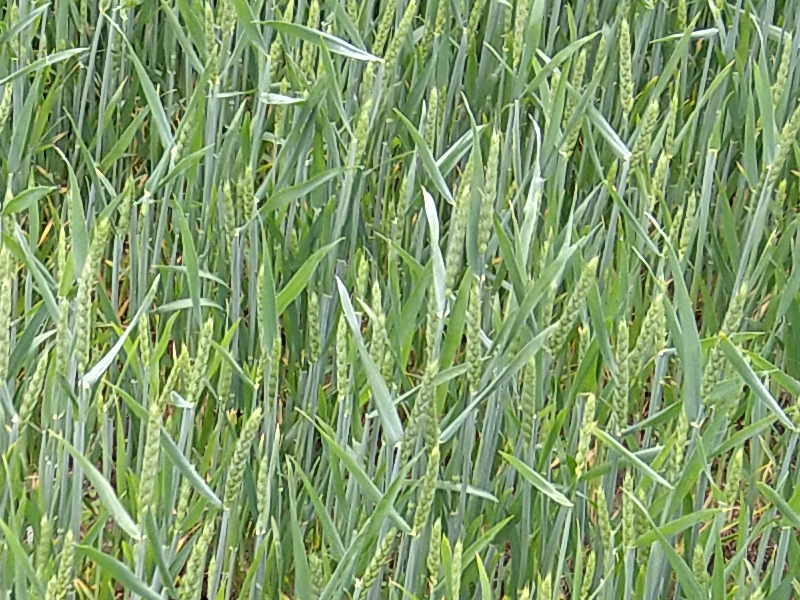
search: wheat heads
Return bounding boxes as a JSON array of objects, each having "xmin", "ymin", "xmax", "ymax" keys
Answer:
[
  {"xmin": 0, "ymin": 83, "xmax": 14, "ymax": 142},
  {"xmin": 577, "ymin": 324, "xmax": 590, "ymax": 365},
  {"xmin": 503, "ymin": 0, "xmax": 514, "ymax": 35},
  {"xmin": 274, "ymin": 76, "xmax": 289, "ymax": 135},
  {"xmin": 180, "ymin": 525, "xmax": 211, "ymax": 600},
  {"xmin": 413, "ymin": 447, "xmax": 441, "ymax": 535},
  {"xmin": 467, "ymin": 0, "xmax": 483, "ymax": 44},
  {"xmin": 136, "ymin": 200, "xmax": 145, "ymax": 241},
  {"xmin": 181, "ymin": 342, "xmax": 190, "ymax": 390},
  {"xmin": 345, "ymin": 101, "xmax": 373, "ymax": 167},
  {"xmin": 81, "ymin": 251, "xmax": 91, "ymax": 284},
  {"xmin": 308, "ymin": 554, "xmax": 326, "ymax": 600},
  {"xmin": 202, "ymin": 0, "xmax": 218, "ymax": 82},
  {"xmin": 652, "ymin": 153, "xmax": 668, "ymax": 196},
  {"xmin": 255, "ymin": 352, "xmax": 266, "ymax": 385},
  {"xmin": 724, "ymin": 449, "xmax": 743, "ymax": 507},
  {"xmin": 224, "ymin": 181, "xmax": 239, "ymax": 260},
  {"xmin": 223, "ymin": 0, "xmax": 240, "ymax": 32},
  {"xmin": 548, "ymin": 257, "xmax": 598, "ymax": 356},
  {"xmin": 17, "ymin": 349, "xmax": 45, "ymax": 433},
  {"xmin": 438, "ymin": 84, "xmax": 447, "ymax": 127},
  {"xmin": 678, "ymin": 0, "xmax": 688, "ymax": 33},
  {"xmin": 626, "ymin": 102, "xmax": 659, "ymax": 179},
  {"xmin": 514, "ymin": 0, "xmax": 529, "ymax": 67},
  {"xmin": 578, "ymin": 549, "xmax": 596, "ymax": 600},
  {"xmin": 538, "ymin": 573, "xmax": 557, "ymax": 600},
  {"xmin": 0, "ymin": 245, "xmax": 7, "ymax": 342},
  {"xmin": 136, "ymin": 405, "xmax": 161, "ymax": 520},
  {"xmin": 59, "ymin": 226, "xmax": 66, "ymax": 276},
  {"xmin": 173, "ymin": 111, "xmax": 193, "ymax": 169},
  {"xmin": 750, "ymin": 167, "xmax": 768, "ymax": 216},
  {"xmin": 770, "ymin": 98, "xmax": 800, "ymax": 183},
  {"xmin": 236, "ymin": 175, "xmax": 242, "ymax": 216},
  {"xmin": 548, "ymin": 67, "xmax": 560, "ymax": 111},
  {"xmin": 466, "ymin": 285, "xmax": 482, "ymax": 389},
  {"xmin": 118, "ymin": 177, "xmax": 132, "ymax": 238},
  {"xmin": 361, "ymin": 61, "xmax": 374, "ymax": 99},
  {"xmin": 302, "ymin": 0, "xmax": 320, "ymax": 70},
  {"xmin": 396, "ymin": 362, "xmax": 437, "ymax": 471},
  {"xmin": 456, "ymin": 146, "xmax": 476, "ymax": 205},
  {"xmin": 386, "ymin": 202, "xmax": 396, "ymax": 231},
  {"xmin": 575, "ymin": 393, "xmax": 596, "ymax": 480},
  {"xmin": 522, "ymin": 356, "xmax": 535, "ymax": 442},
  {"xmin": 680, "ymin": 192, "xmax": 697, "ymax": 260},
  {"xmin": 592, "ymin": 23, "xmax": 610, "ymax": 73},
  {"xmin": 12, "ymin": 1, "xmax": 19, "ymax": 50},
  {"xmin": 231, "ymin": 0, "xmax": 244, "ymax": 31},
  {"xmin": 427, "ymin": 518, "xmax": 442, "ymax": 587},
  {"xmin": 38, "ymin": 516, "xmax": 51, "ymax": 567},
  {"xmin": 81, "ymin": 0, "xmax": 87, "ymax": 29},
  {"xmin": 507, "ymin": 329, "xmax": 522, "ymax": 364},
  {"xmin": 359, "ymin": 527, "xmax": 394, "ymax": 599},
  {"xmin": 379, "ymin": 0, "xmax": 416, "ymax": 97},
  {"xmin": 675, "ymin": 412, "xmax": 687, "ymax": 465},
  {"xmin": 372, "ymin": 0, "xmax": 400, "ymax": 70},
  {"xmin": 774, "ymin": 32, "xmax": 796, "ymax": 101},
  {"xmin": 775, "ymin": 179, "xmax": 786, "ymax": 215},
  {"xmin": 206, "ymin": 558, "xmax": 217, "ymax": 595},
  {"xmin": 665, "ymin": 95, "xmax": 678, "ymax": 152},
  {"xmin": 418, "ymin": 21, "xmax": 432, "ymax": 69},
  {"xmin": 616, "ymin": 322, "xmax": 629, "ymax": 432},
  {"xmin": 435, "ymin": 0, "xmax": 447, "ymax": 41},
  {"xmin": 726, "ymin": 355, "xmax": 752, "ymax": 418},
  {"xmin": 336, "ymin": 315, "xmax": 347, "ymax": 403},
  {"xmin": 450, "ymin": 541, "xmax": 462, "ymax": 600},
  {"xmin": 691, "ymin": 543, "xmax": 706, "ymax": 594},
  {"xmin": 562, "ymin": 43, "xmax": 589, "ymax": 130},
  {"xmin": 258, "ymin": 454, "xmax": 267, "ymax": 514},
  {"xmin": 308, "ymin": 291, "xmax": 320, "ymax": 365},
  {"xmin": 426, "ymin": 284, "xmax": 440, "ymax": 356},
  {"xmin": 89, "ymin": 217, "xmax": 110, "ymax": 284},
  {"xmin": 478, "ymin": 131, "xmax": 501, "ymax": 256},
  {"xmin": 24, "ymin": 587, "xmax": 40, "ymax": 600},
  {"xmin": 346, "ymin": 0, "xmax": 358, "ymax": 21},
  {"xmin": 158, "ymin": 350, "xmax": 186, "ymax": 405},
  {"xmin": 396, "ymin": 180, "xmax": 408, "ymax": 249},
  {"xmin": 66, "ymin": 193, "xmax": 75, "ymax": 239},
  {"xmin": 356, "ymin": 255, "xmax": 367, "ymax": 298},
  {"xmin": 255, "ymin": 264, "xmax": 266, "ymax": 336},
  {"xmin": 56, "ymin": 298, "xmax": 68, "ymax": 379},
  {"xmin": 382, "ymin": 351, "xmax": 393, "ymax": 385},
  {"xmin": 0, "ymin": 280, "xmax": 11, "ymax": 382},
  {"xmin": 622, "ymin": 476, "xmax": 634, "ymax": 551},
  {"xmin": 636, "ymin": 489, "xmax": 650, "ymax": 566},
  {"xmin": 267, "ymin": 337, "xmax": 280, "ymax": 406},
  {"xmin": 223, "ymin": 407, "xmax": 264, "ymax": 511},
  {"xmin": 218, "ymin": 0, "xmax": 231, "ymax": 22},
  {"xmin": 596, "ymin": 489, "xmax": 613, "ymax": 554},
  {"xmin": 55, "ymin": 530, "xmax": 74, "ymax": 600},
  {"xmin": 175, "ymin": 477, "xmax": 193, "ymax": 531},
  {"xmin": 701, "ymin": 287, "xmax": 746, "ymax": 400},
  {"xmin": 187, "ymin": 317, "xmax": 213, "ymax": 404},
  {"xmin": 425, "ymin": 388, "xmax": 438, "ymax": 454},
  {"xmin": 662, "ymin": 205, "xmax": 683, "ymax": 258},
  {"xmin": 632, "ymin": 295, "xmax": 662, "ymax": 364},
  {"xmin": 38, "ymin": 578, "xmax": 55, "ymax": 600},
  {"xmin": 3, "ymin": 189, "xmax": 13, "ymax": 240},
  {"xmin": 243, "ymin": 164, "xmax": 254, "ymax": 223},
  {"xmin": 445, "ymin": 185, "xmax": 470, "ymax": 289},
  {"xmin": 564, "ymin": 107, "xmax": 587, "ymax": 154},
  {"xmin": 538, "ymin": 417, "xmax": 551, "ymax": 447},
  {"xmin": 656, "ymin": 305, "xmax": 666, "ymax": 351},
  {"xmin": 424, "ymin": 87, "xmax": 438, "ymax": 149},
  {"xmin": 620, "ymin": 16, "xmax": 634, "ymax": 113},
  {"xmin": 77, "ymin": 279, "xmax": 90, "ymax": 372},
  {"xmin": 371, "ymin": 281, "xmax": 386, "ymax": 371},
  {"xmin": 218, "ymin": 350, "xmax": 234, "ymax": 407},
  {"xmin": 621, "ymin": 0, "xmax": 632, "ymax": 16},
  {"xmin": 268, "ymin": 0, "xmax": 297, "ymax": 76},
  {"xmin": 139, "ymin": 313, "xmax": 149, "ymax": 363}
]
